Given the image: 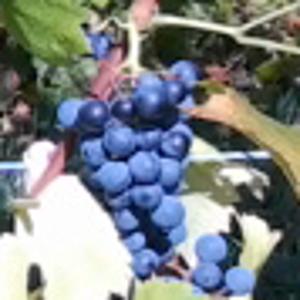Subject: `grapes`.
Segmentation results:
<instances>
[{"mask_svg":"<svg viewBox=\"0 0 300 300\" xmlns=\"http://www.w3.org/2000/svg\"><path fill=\"white\" fill-rule=\"evenodd\" d=\"M168 79L159 71L120 66L105 99L67 97L56 107L57 124L82 136L79 156L89 168L84 184L104 194L138 278L170 263L189 236L186 206L176 196L194 143L187 123L203 71L180 57L170 63Z\"/></svg>","mask_w":300,"mask_h":300,"instance_id":"obj_1","label":"grapes"},{"mask_svg":"<svg viewBox=\"0 0 300 300\" xmlns=\"http://www.w3.org/2000/svg\"><path fill=\"white\" fill-rule=\"evenodd\" d=\"M196 260L189 273L191 291L201 296L219 293L223 287L231 297H246L256 285L254 272L245 265H232L225 272L218 265L229 253V241L219 233H206L194 244Z\"/></svg>","mask_w":300,"mask_h":300,"instance_id":"obj_2","label":"grapes"},{"mask_svg":"<svg viewBox=\"0 0 300 300\" xmlns=\"http://www.w3.org/2000/svg\"><path fill=\"white\" fill-rule=\"evenodd\" d=\"M114 36L108 32L90 33L87 36V46L93 54L96 63H105L111 54Z\"/></svg>","mask_w":300,"mask_h":300,"instance_id":"obj_3","label":"grapes"}]
</instances>
